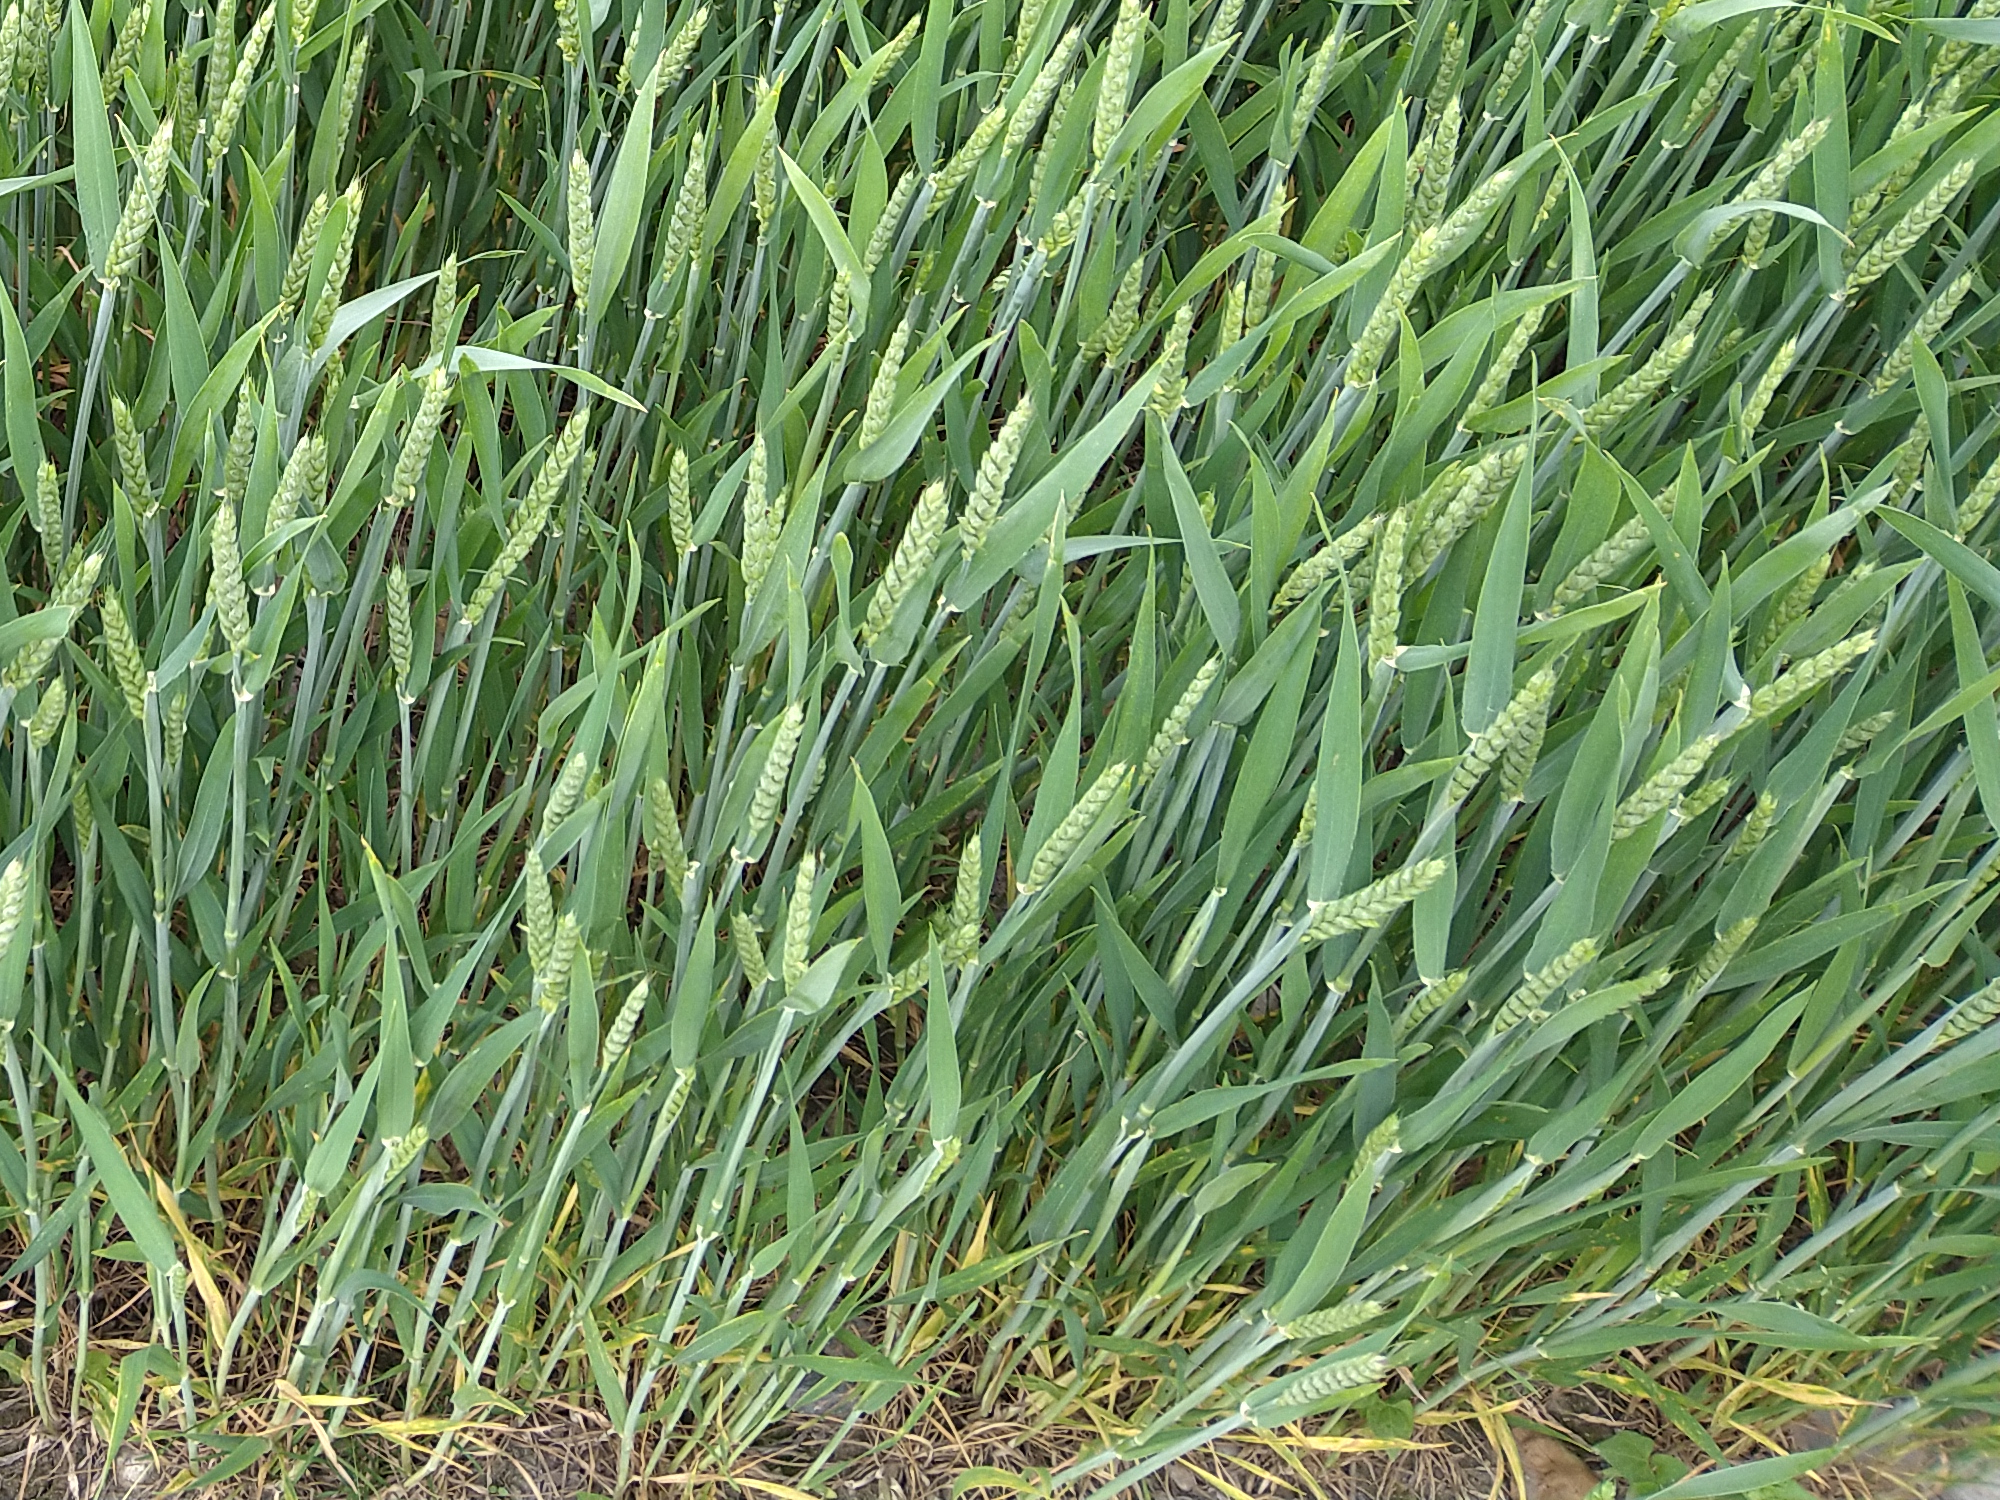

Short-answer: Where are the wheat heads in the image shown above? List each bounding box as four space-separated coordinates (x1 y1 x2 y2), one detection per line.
647 11 707 93
38 532 81 613
1460 300 1549 435
264 443 304 549
1111 253 1145 367
952 836 980 936
542 916 581 1000
322 373 341 431
1142 654 1221 784
1452 670 1557 798
0 2 22 140
1686 916 1755 995
1749 554 1825 663
651 778 687 902
377 1127 427 1183
37 464 68 572
784 854 817 983
1412 94 1463 227
545 752 586 838
101 585 150 717
1698 119 1830 240
394 371 448 505
922 103 1008 220
1147 305 1195 432
46 0 70 38
1507 696 1546 802
1000 573 1038 646
1578 329 1698 428
1721 792 1776 871
828 261 853 359
1847 162 1976 288
1678 780 1731 818
1 558 103 690
1040 166 1099 256
1011 30 1086 147
1219 278 1244 359
666 1073 692 1122
865 484 951 646
1828 565 1871 613
1403 134 1430 220
29 682 65 744
751 704 808 828
731 916 768 987
109 396 154 516
1093 0 1146 161
330 35 370 185
1292 38 1339 146
1350 1115 1400 1192
1492 942 1599 1036
526 851 554 975
306 436 327 526
601 977 651 1066
166 688 187 772
1711 326 1749 355
70 764 101 841
1885 414 1930 505
1371 513 1406 680
1306 861 1447 939
1494 0 1557 108
1922 0 2000 88
208 5 276 158
550 0 581 54
863 14 921 90
171 53 200 136
1934 978 2000 1048
1265 1354 1391 1408
745 434 769 582
1032 759 1127 891
569 146 595 300
1080 312 1109 358
383 569 410 682
801 752 828 802
1885 146 1928 195
867 172 923 270
102 9 143 114
1677 12 1759 131
658 135 711 277
1869 266 1971 394
1838 710 1895 757
1635 965 1671 996
1745 630 1871 727
859 318 914 447
890 923 980 1001
1272 513 1381 613
453 407 591 643
18 0 48 77
766 491 786 537
667 443 692 557
1962 838 2000 903
1611 731 1716 842
1940 36 2000 102
960 389 1032 556
1207 0 1250 54
1014 0 1055 81
0 858 25 996
1406 464 1476 557
615 11 651 76
1733 334 1799 443
1766 42 1825 106
213 0 232 114
1670 288 1717 339
1425 38 1461 149
1777 0 1837 46
753 127 777 225
1298 785 1324 846
1276 1296 1387 1341
1245 183 1285 326
1182 495 1212 613
1431 168 1517 269
209 507 244 650
302 184 366 354
220 377 257 500
435 248 456 359
1947 460 2000 532
1351 227 1438 379
1847 101 1930 215
1403 975 1469 1037
590 931 607 977
277 192 329 305
103 122 175 278
1403 447 1525 586
1741 186 1784 261
1560 479 1679 614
